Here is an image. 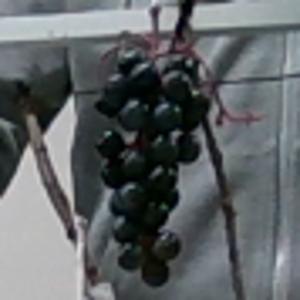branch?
<instances>
[{
	"label": "branch",
	"instance_id": "obj_3",
	"mask_svg": "<svg viewBox=\"0 0 300 300\" xmlns=\"http://www.w3.org/2000/svg\"><path fill=\"white\" fill-rule=\"evenodd\" d=\"M197 5L198 0H177L178 19L174 25L171 46L177 55H187L194 59L197 65V72L190 81L195 89L203 90L200 70L204 61L197 52L192 50L200 41V37L194 33L191 26L194 18V9Z\"/></svg>",
	"mask_w": 300,
	"mask_h": 300
},
{
	"label": "branch",
	"instance_id": "obj_1",
	"mask_svg": "<svg viewBox=\"0 0 300 300\" xmlns=\"http://www.w3.org/2000/svg\"><path fill=\"white\" fill-rule=\"evenodd\" d=\"M13 93L19 116L30 141L40 184L46 192L56 220L60 223V228L68 244L76 251L88 288L92 291L94 300H114L108 285L99 278L98 266L91 262L80 241L79 230L75 225L71 210V200L67 190L62 188L60 184L43 139L41 120L34 101L33 89L22 79L15 78L13 80Z\"/></svg>",
	"mask_w": 300,
	"mask_h": 300
},
{
	"label": "branch",
	"instance_id": "obj_2",
	"mask_svg": "<svg viewBox=\"0 0 300 300\" xmlns=\"http://www.w3.org/2000/svg\"><path fill=\"white\" fill-rule=\"evenodd\" d=\"M208 154V162L214 173L219 194V203L224 216L225 245L228 250V262L234 300H249L241 264V247L237 238L239 213L236 211L229 187L228 175L224 166V153L218 147V140L213 131L211 113L200 126Z\"/></svg>",
	"mask_w": 300,
	"mask_h": 300
}]
</instances>
